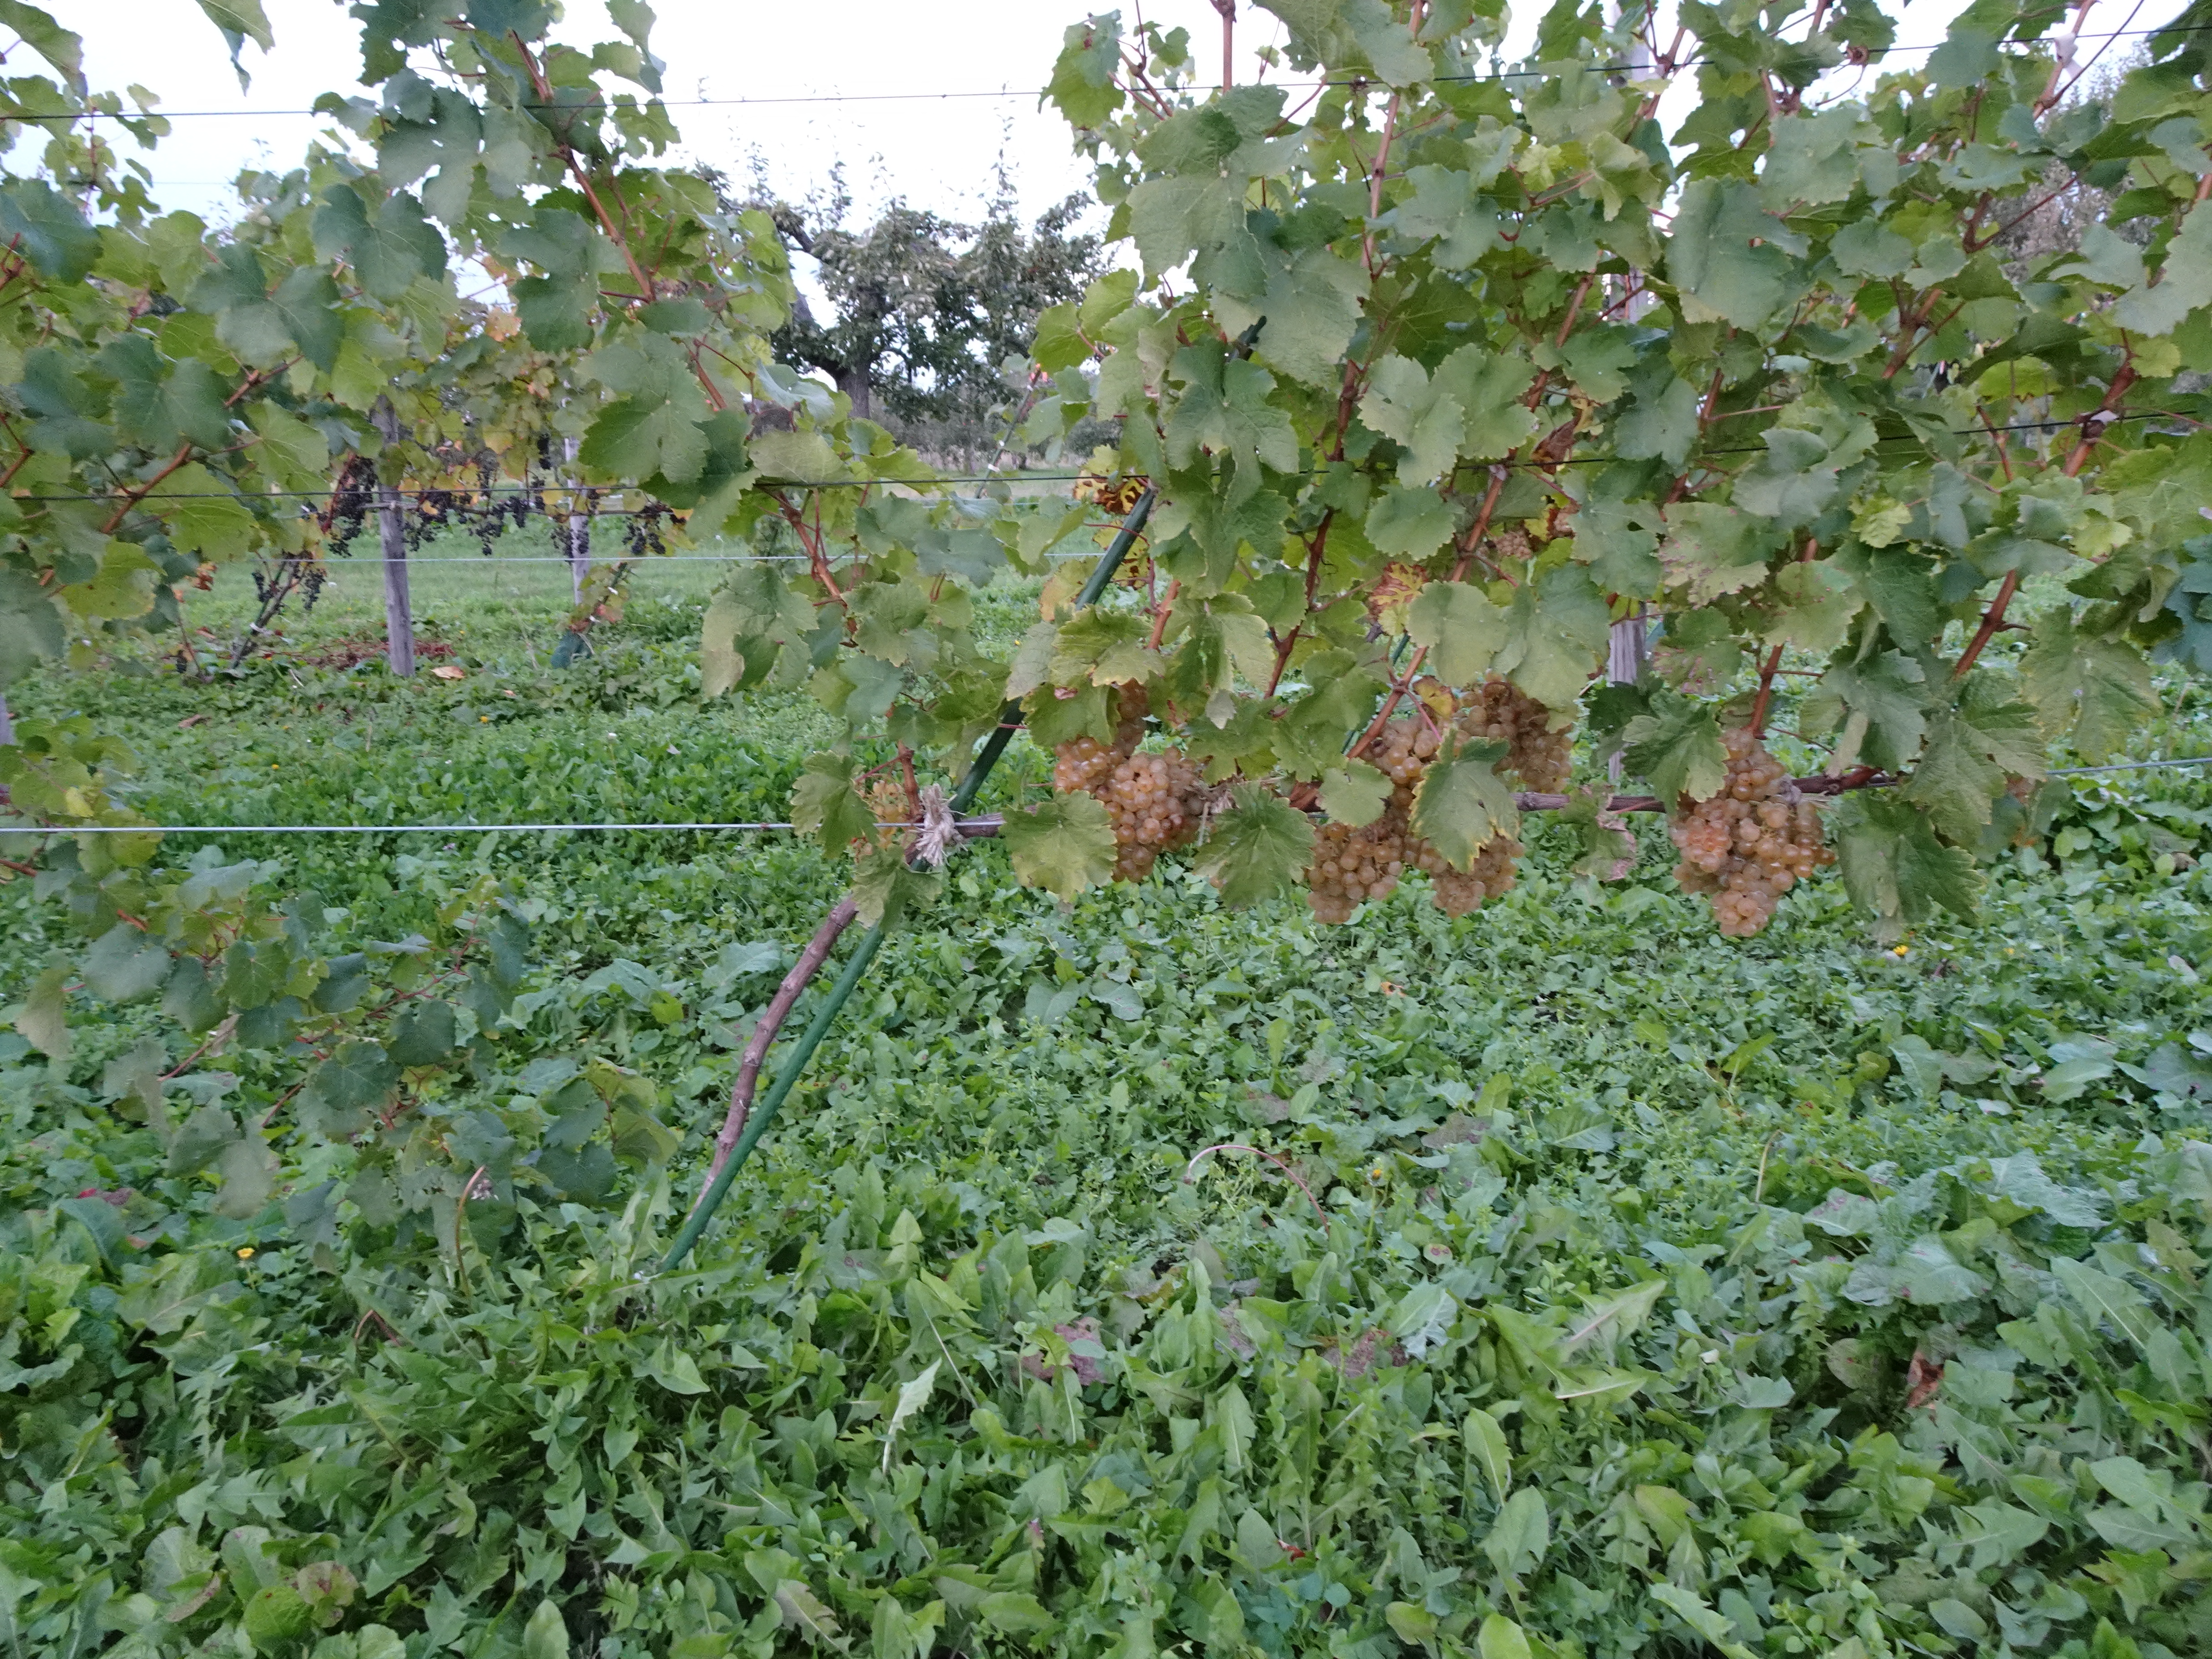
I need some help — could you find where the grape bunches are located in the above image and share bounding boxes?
[2004,771,2033,806]
[1711,783,1834,943]
[1507,698,1579,804]
[1667,728,1786,873]
[1360,713,1440,847]
[1303,822,1366,926]
[1552,502,1578,533]
[1405,835,1451,872]
[1431,863,1484,921]
[1496,533,1534,562]
[1095,745,1196,884]
[1452,669,1518,774]
[1672,863,1720,897]
[1103,677,1151,758]
[856,779,909,858]
[1164,791,1204,853]
[1471,835,1525,901]
[1051,737,1125,800]
[1358,844,1409,901]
